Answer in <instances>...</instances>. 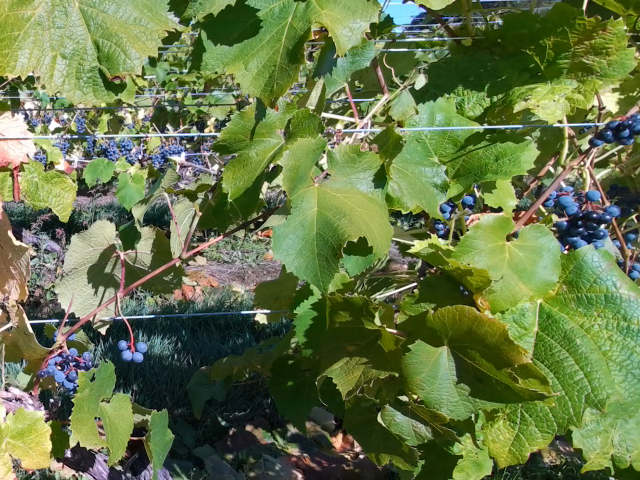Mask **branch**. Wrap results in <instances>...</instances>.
<instances>
[{
  "label": "branch",
  "instance_id": "2",
  "mask_svg": "<svg viewBox=\"0 0 640 480\" xmlns=\"http://www.w3.org/2000/svg\"><path fill=\"white\" fill-rule=\"evenodd\" d=\"M590 153V149L586 148L584 151H582L580 154H578L572 162H570L558 175L557 179H554L553 182L551 183V185L549 186V189L535 202L532 204L531 207H529L525 213L524 216H522L519 221L516 223L515 228L519 229L521 227V225L528 220L534 213L535 211L544 203L548 200V198L550 197L551 193L554 191V189L556 188L557 185H559L560 183H563L565 178L567 177L568 173L572 170V169H576L579 162L586 157L588 154Z\"/></svg>",
  "mask_w": 640,
  "mask_h": 480
},
{
  "label": "branch",
  "instance_id": "1",
  "mask_svg": "<svg viewBox=\"0 0 640 480\" xmlns=\"http://www.w3.org/2000/svg\"><path fill=\"white\" fill-rule=\"evenodd\" d=\"M272 215L271 211H267V212H263L257 216L252 217L251 219H248L246 221H244L243 223H241L240 225L234 227L233 229L223 233L221 236L214 238L212 240H210L209 242H206L204 244H201L193 249H191L190 251H188L187 253H184L183 255H180L178 257H176L175 259L171 260L169 263L161 265L159 267H156L155 269H153L151 272H149L147 275H145L144 277L140 278L138 281H135L132 285L126 286L124 288H121L115 295H113L110 299H108L107 301L101 303L99 306H97L90 314H88L85 318H83L81 321H79L78 323H76L74 326H72L71 328H69L59 339H58V343L62 344L73 332H75L76 330H78L79 328H81L83 325H85L87 322H89L94 316H96L101 310H103L104 308L110 306L112 303H114L117 299H119L124 293L129 292L134 290L135 288H137L138 286L142 285L144 282L148 281L149 279H151L153 276H155L157 273L162 272L166 269H169L171 267H173L174 265H176L177 263H179L182 260H185L186 258H189L190 256H192L193 254L202 251L204 249H207L208 247H211L213 245H215L216 243H219L223 240H225L226 238L232 236L233 234H235L236 232H239L241 230H244L248 225H251L253 223H255L256 221H259L261 219H264L266 217H269Z\"/></svg>",
  "mask_w": 640,
  "mask_h": 480
},
{
  "label": "branch",
  "instance_id": "3",
  "mask_svg": "<svg viewBox=\"0 0 640 480\" xmlns=\"http://www.w3.org/2000/svg\"><path fill=\"white\" fill-rule=\"evenodd\" d=\"M40 382H41V378H40V377H37V378L35 379V383H34L33 391H32V396H33V399H34V400H37V399H38V388H39V386H40Z\"/></svg>",
  "mask_w": 640,
  "mask_h": 480
},
{
  "label": "branch",
  "instance_id": "4",
  "mask_svg": "<svg viewBox=\"0 0 640 480\" xmlns=\"http://www.w3.org/2000/svg\"><path fill=\"white\" fill-rule=\"evenodd\" d=\"M58 350H59V346H56V348H54L53 350H51V351L48 353L47 358H46V359H44L43 364H42V366L40 367V369H43L44 367H47V362H49V361H50V357H51L54 353H56Z\"/></svg>",
  "mask_w": 640,
  "mask_h": 480
}]
</instances>
